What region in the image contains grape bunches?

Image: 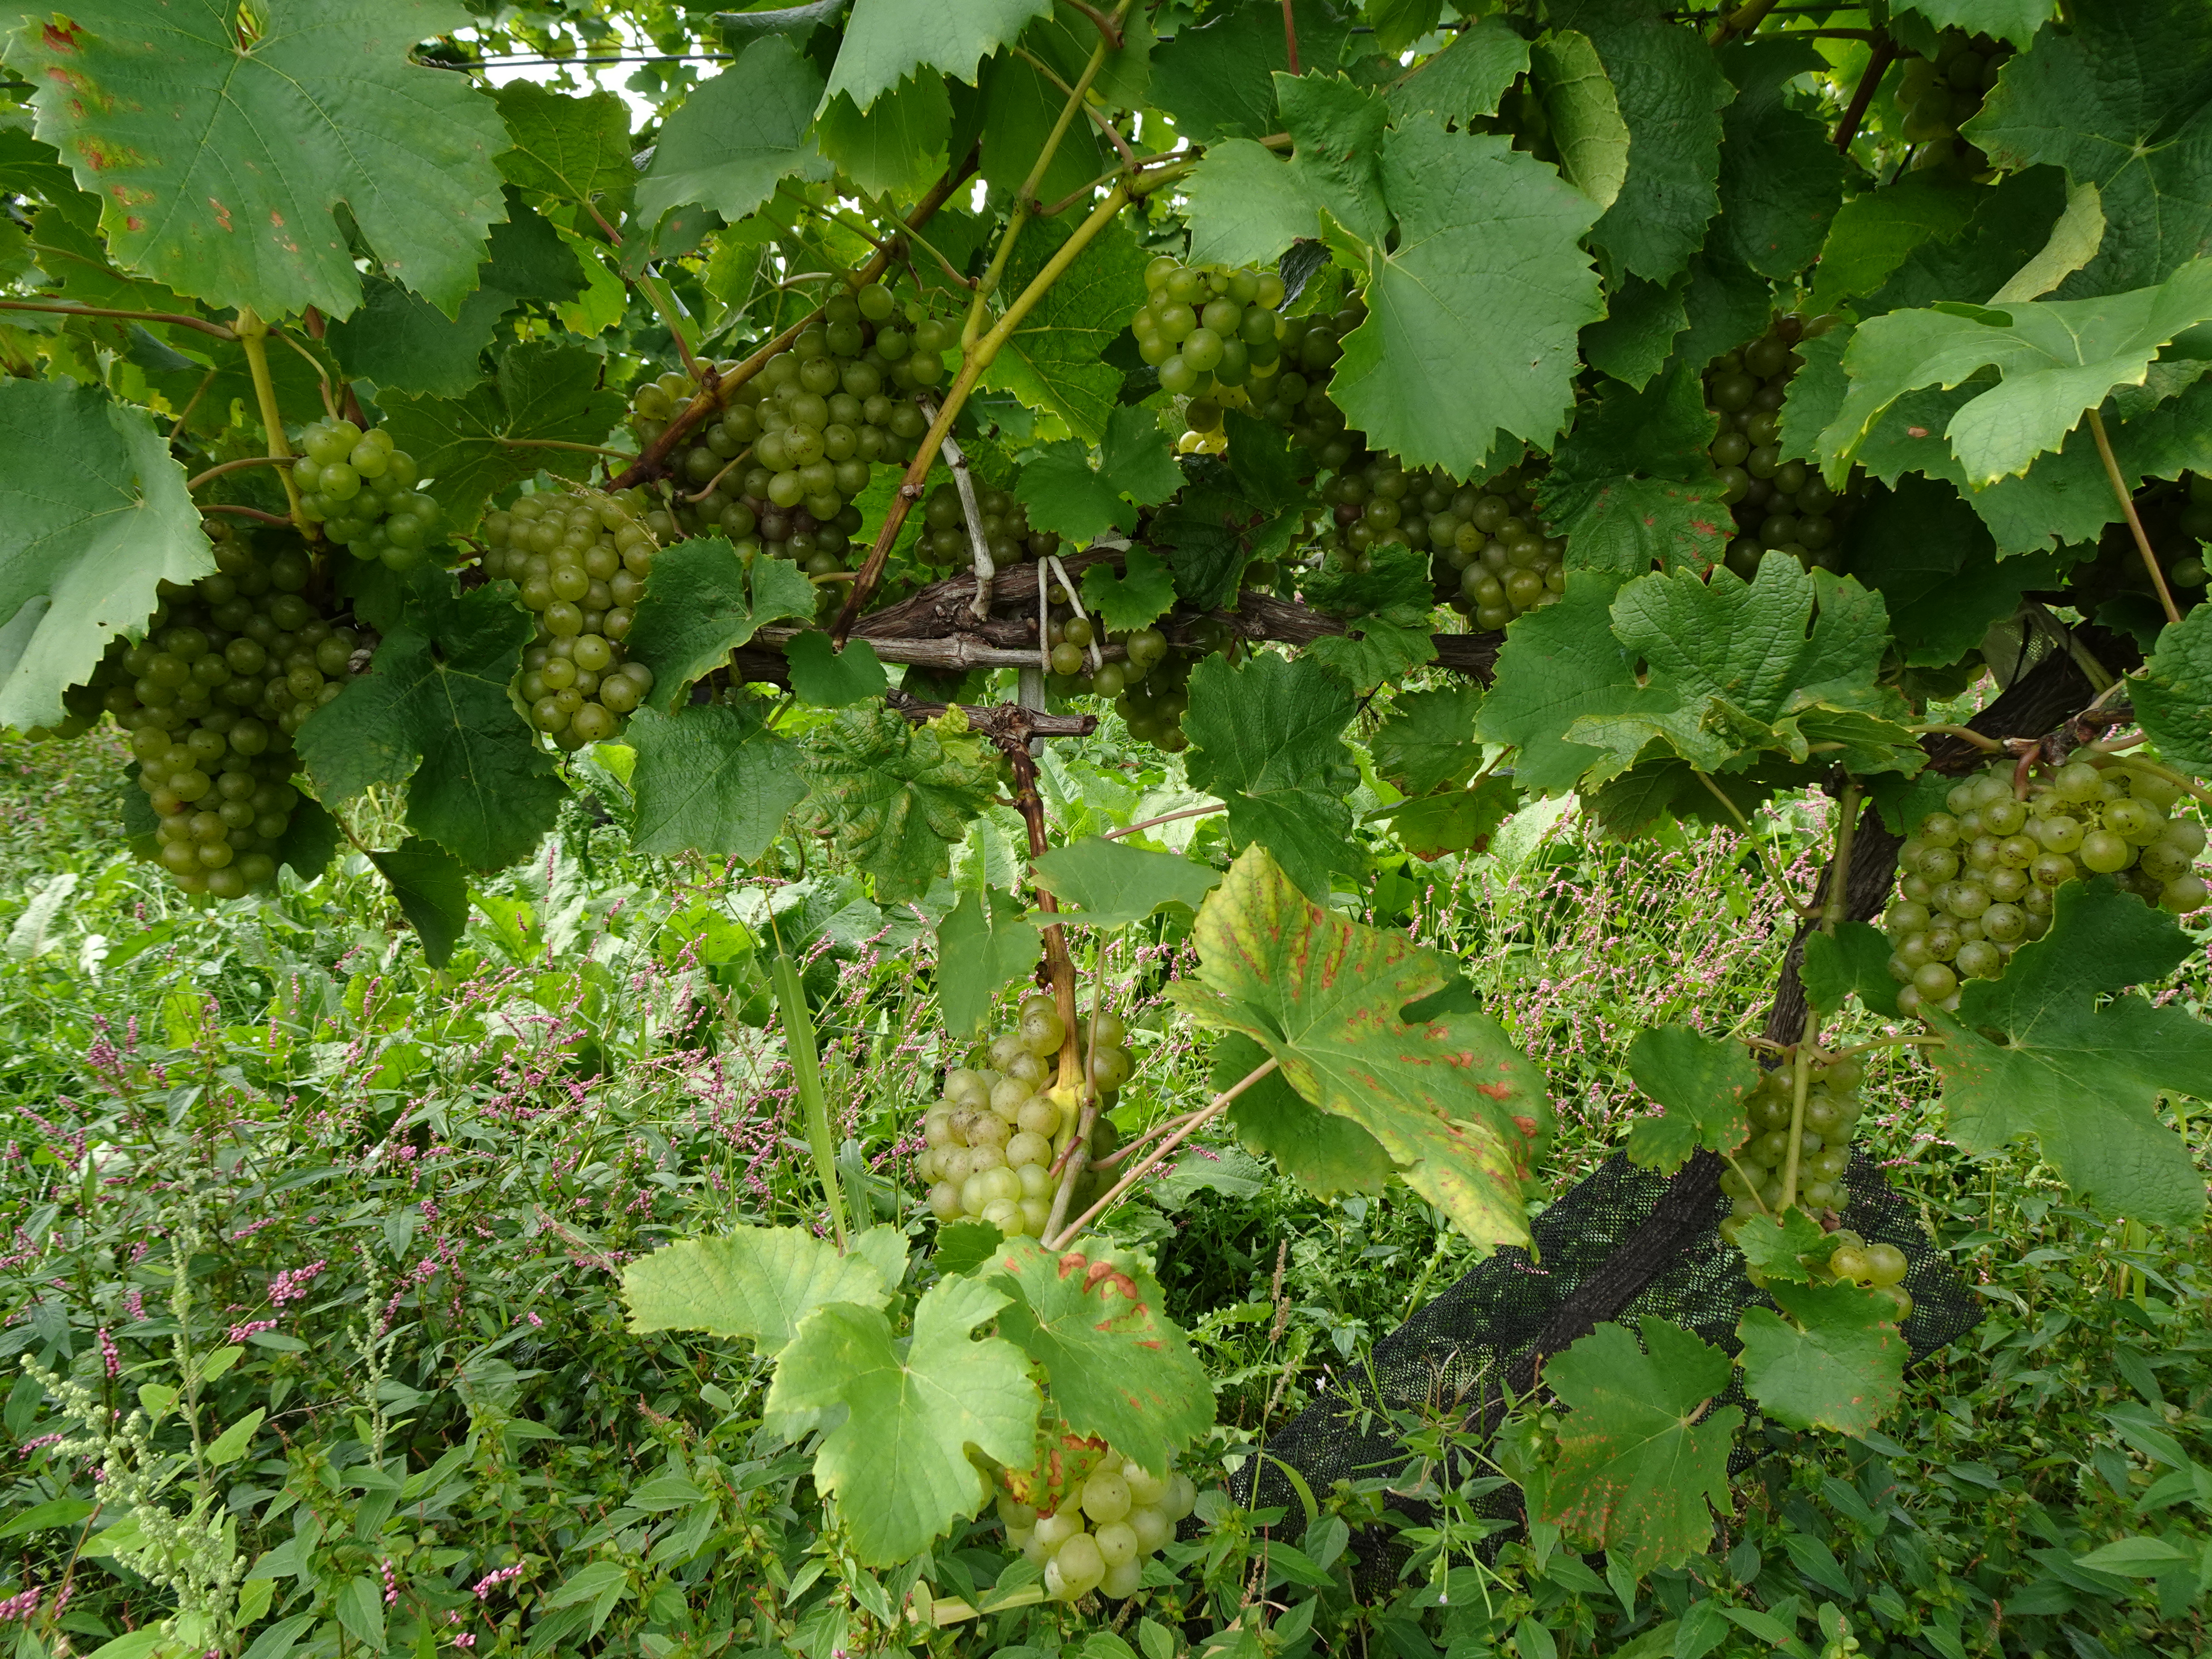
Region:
[1245,288,1374,471]
[915,465,1061,570]
[1116,506,1326,752]
[291,418,441,575]
[633,356,863,627]
[1701,310,1875,585]
[753,283,948,519]
[483,486,681,751]
[971,1443,1198,1600]
[2042,747,2205,913]
[915,994,1135,1252]
[1178,429,1228,454]
[1885,760,2092,1022]
[1808,1229,1913,1322]
[2066,473,2212,622]
[1312,452,1436,569]
[1422,465,1567,632]
[26,663,108,743]
[1047,583,1168,698]
[86,520,384,902]
[1131,255,1285,432]
[1719,1044,1864,1288]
